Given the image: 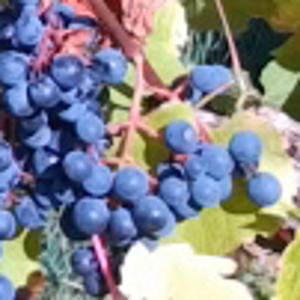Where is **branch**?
<instances>
[{
  "label": "branch",
  "mask_w": 300,
  "mask_h": 300,
  "mask_svg": "<svg viewBox=\"0 0 300 300\" xmlns=\"http://www.w3.org/2000/svg\"><path fill=\"white\" fill-rule=\"evenodd\" d=\"M89 5L92 13L121 50L127 52L136 62L139 57L144 59L142 72L144 73L143 79L147 85L158 93L169 94L172 91V86L156 72L149 55L127 35L112 12L111 7L108 4H104L102 0H89Z\"/></svg>",
  "instance_id": "branch-1"
}]
</instances>
